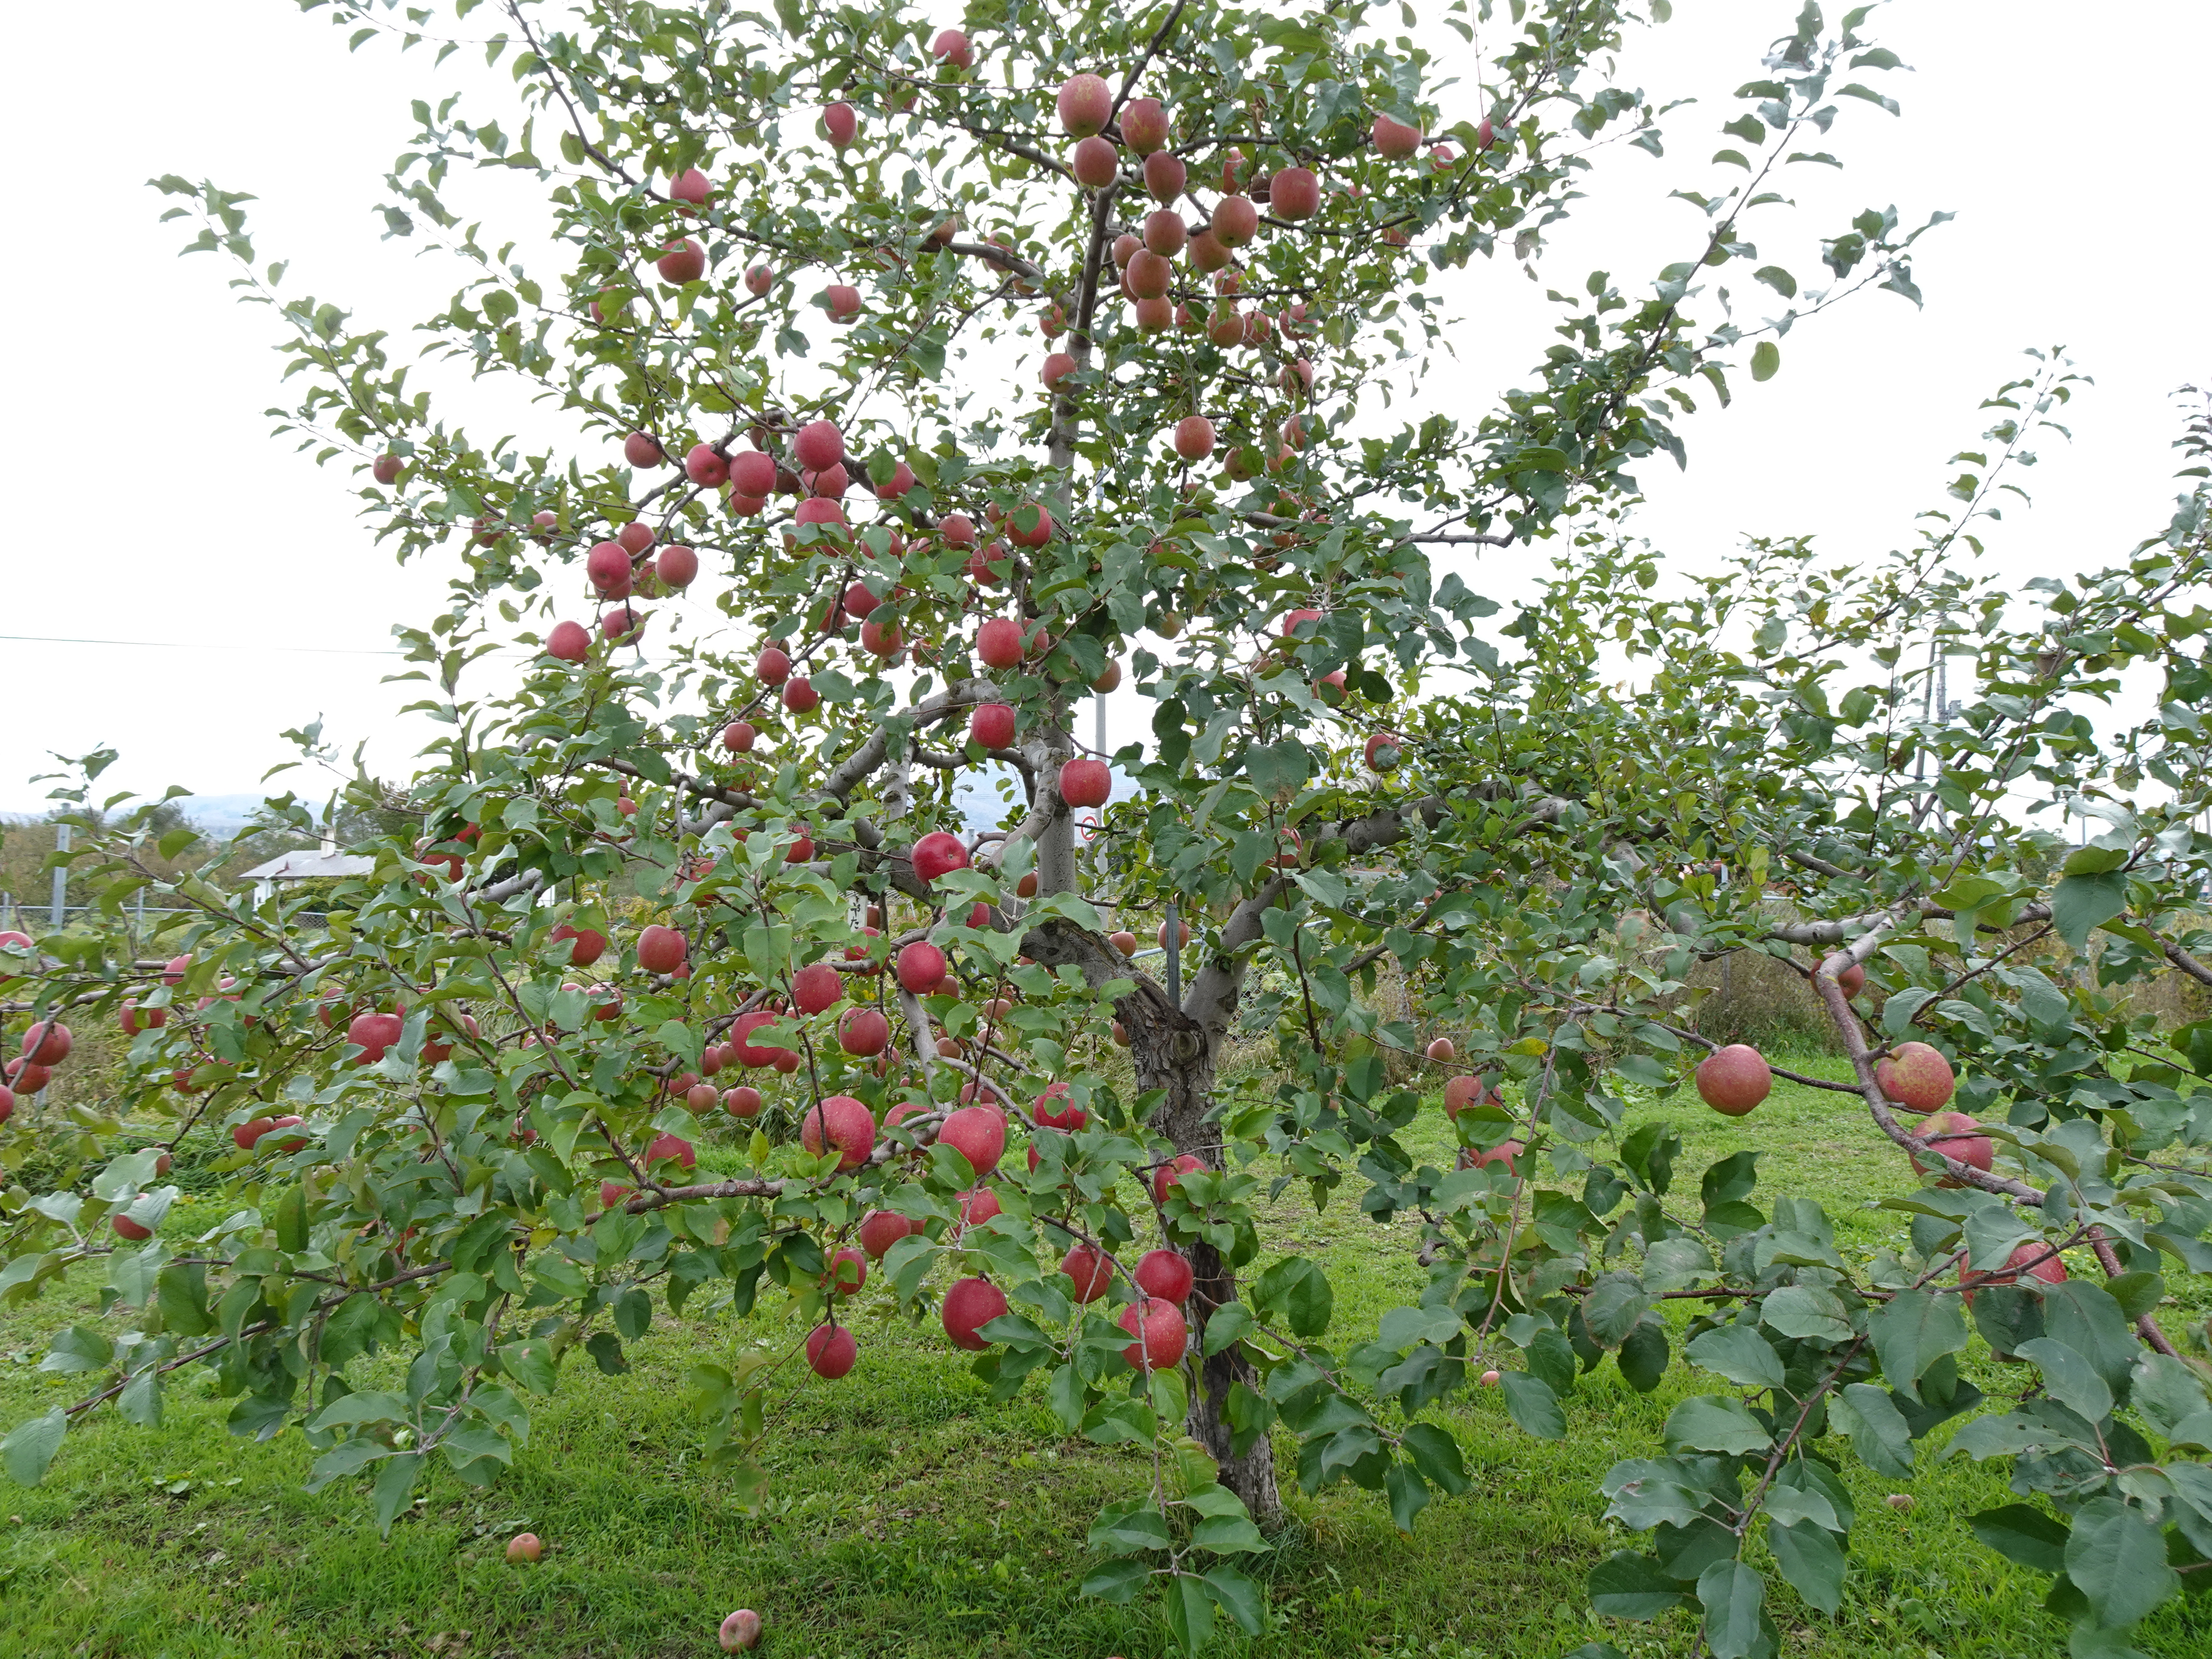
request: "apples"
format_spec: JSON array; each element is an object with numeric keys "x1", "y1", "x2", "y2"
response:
[
  {"x1": 983, "y1": 998, "x2": 1014, "y2": 1028},
  {"x1": 861, "y1": 615, "x2": 901, "y2": 658},
  {"x1": 1373, "y1": 102, "x2": 1424, "y2": 161},
  {"x1": 969, "y1": 542, "x2": 1007, "y2": 586},
  {"x1": 1057, "y1": 1241, "x2": 1115, "y2": 1306},
  {"x1": 718, "y1": 1090, "x2": 751, "y2": 1116},
  {"x1": 1320, "y1": 1097, "x2": 1340, "y2": 1119},
  {"x1": 596, "y1": 793, "x2": 644, "y2": 845},
  {"x1": 1033, "y1": 1081, "x2": 1092, "y2": 1135},
  {"x1": 756, "y1": 648, "x2": 791, "y2": 687},
  {"x1": 958, "y1": 1081, "x2": 998, "y2": 1115},
  {"x1": 672, "y1": 856, "x2": 726, "y2": 908},
  {"x1": 638, "y1": 1129, "x2": 698, "y2": 1191},
  {"x1": 449, "y1": 810, "x2": 498, "y2": 851},
  {"x1": 413, "y1": 836, "x2": 468, "y2": 891},
  {"x1": 1159, "y1": 813, "x2": 1183, "y2": 836},
  {"x1": 717, "y1": 759, "x2": 758, "y2": 798},
  {"x1": 862, "y1": 1044, "x2": 902, "y2": 1081},
  {"x1": 1086, "y1": 655, "x2": 1122, "y2": 695},
  {"x1": 1059, "y1": 758, "x2": 1112, "y2": 810},
  {"x1": 1456, "y1": 1137, "x2": 1530, "y2": 1199},
  {"x1": 1370, "y1": 556, "x2": 1408, "y2": 589},
  {"x1": 693, "y1": 1046, "x2": 723, "y2": 1076},
  {"x1": 1457, "y1": 879, "x2": 1474, "y2": 895},
  {"x1": 952, "y1": 548, "x2": 981, "y2": 577},
  {"x1": 667, "y1": 1009, "x2": 700, "y2": 1037},
  {"x1": 883, "y1": 1101, "x2": 940, "y2": 1165},
  {"x1": 656, "y1": 544, "x2": 699, "y2": 587},
  {"x1": 710, "y1": 980, "x2": 752, "y2": 1015},
  {"x1": 934, "y1": 1037, "x2": 962, "y2": 1067},
  {"x1": 936, "y1": 513, "x2": 977, "y2": 556},
  {"x1": 1223, "y1": 441, "x2": 1263, "y2": 482},
  {"x1": 862, "y1": 527, "x2": 904, "y2": 569},
  {"x1": 1427, "y1": 1037, "x2": 1455, "y2": 1067},
  {"x1": 821, "y1": 101, "x2": 857, "y2": 147},
  {"x1": 407, "y1": 1113, "x2": 446, "y2": 1149},
  {"x1": 549, "y1": 907, "x2": 611, "y2": 969},
  {"x1": 975, "y1": 1102, "x2": 1011, "y2": 1140},
  {"x1": 783, "y1": 677, "x2": 819, "y2": 716},
  {"x1": 799, "y1": 460, "x2": 849, "y2": 505},
  {"x1": 1016, "y1": 619, "x2": 1049, "y2": 661},
  {"x1": 939, "y1": 1024, "x2": 969, "y2": 1044},
  {"x1": 896, "y1": 940, "x2": 947, "y2": 996},
  {"x1": 754, "y1": 996, "x2": 790, "y2": 1028},
  {"x1": 859, "y1": 1206, "x2": 913, "y2": 1259},
  {"x1": 135, "y1": 1146, "x2": 171, "y2": 1180},
  {"x1": 1282, "y1": 606, "x2": 1330, "y2": 654},
  {"x1": 1121, "y1": 95, "x2": 1170, "y2": 155},
  {"x1": 578, "y1": 1037, "x2": 600, "y2": 1055},
  {"x1": 995, "y1": 982, "x2": 1016, "y2": 1004},
  {"x1": 819, "y1": 524, "x2": 856, "y2": 557},
  {"x1": 813, "y1": 595, "x2": 846, "y2": 634},
  {"x1": 783, "y1": 527, "x2": 815, "y2": 559},
  {"x1": 1057, "y1": 72, "x2": 1113, "y2": 138},
  {"x1": 1177, "y1": 296, "x2": 1208, "y2": 336},
  {"x1": 761, "y1": 636, "x2": 790, "y2": 665},
  {"x1": 1040, "y1": 303, "x2": 1074, "y2": 336},
  {"x1": 609, "y1": 772, "x2": 630, "y2": 800},
  {"x1": 881, "y1": 67, "x2": 920, "y2": 115},
  {"x1": 1445, "y1": 1073, "x2": 1503, "y2": 1131},
  {"x1": 1206, "y1": 310, "x2": 1245, "y2": 351},
  {"x1": 372, "y1": 453, "x2": 404, "y2": 486},
  {"x1": 1487, "y1": 865, "x2": 1510, "y2": 887},
  {"x1": 919, "y1": 207, "x2": 961, "y2": 250},
  {"x1": 911, "y1": 829, "x2": 970, "y2": 890},
  {"x1": 939, "y1": 1105, "x2": 1004, "y2": 1175},
  {"x1": 731, "y1": 1008, "x2": 789, "y2": 1069},
  {"x1": 838, "y1": 1008, "x2": 890, "y2": 1058},
  {"x1": 1092, "y1": 559, "x2": 1116, "y2": 580},
  {"x1": 1283, "y1": 411, "x2": 1320, "y2": 452},
  {"x1": 906, "y1": 536, "x2": 938, "y2": 566},
  {"x1": 1169, "y1": 362, "x2": 1201, "y2": 392},
  {"x1": 1874, "y1": 1041, "x2": 1956, "y2": 1113},
  {"x1": 1189, "y1": 227, "x2": 1233, "y2": 274},
  {"x1": 913, "y1": 638, "x2": 944, "y2": 668},
  {"x1": 419, "y1": 1013, "x2": 481, "y2": 1071},
  {"x1": 557, "y1": 983, "x2": 588, "y2": 1025},
  {"x1": 793, "y1": 418, "x2": 843, "y2": 472},
  {"x1": 727, "y1": 1085, "x2": 763, "y2": 1118},
  {"x1": 729, "y1": 449, "x2": 777, "y2": 497},
  {"x1": 1253, "y1": 74, "x2": 1290, "y2": 112},
  {"x1": 941, "y1": 1276, "x2": 1009, "y2": 1353},
  {"x1": 846, "y1": 579, "x2": 896, "y2": 622},
  {"x1": 933, "y1": 27, "x2": 974, "y2": 76},
  {"x1": 601, "y1": 608, "x2": 646, "y2": 648},
  {"x1": 618, "y1": 521, "x2": 657, "y2": 562},
  {"x1": 171, "y1": 1051, "x2": 214, "y2": 1093},
  {"x1": 1154, "y1": 1150, "x2": 1212, "y2": 1213},
  {"x1": 22, "y1": 1022, "x2": 73, "y2": 1067},
  {"x1": 583, "y1": 986, "x2": 620, "y2": 1023},
  {"x1": 1142, "y1": 149, "x2": 1187, "y2": 202},
  {"x1": 1210, "y1": 194, "x2": 1260, "y2": 247},
  {"x1": 954, "y1": 900, "x2": 990, "y2": 938},
  {"x1": 1694, "y1": 1043, "x2": 1773, "y2": 1117},
  {"x1": 112, "y1": 1191, "x2": 156, "y2": 1244},
  {"x1": 822, "y1": 284, "x2": 863, "y2": 325},
  {"x1": 686, "y1": 1081, "x2": 718, "y2": 1112},
  {"x1": 743, "y1": 264, "x2": 775, "y2": 297},
  {"x1": 657, "y1": 234, "x2": 705, "y2": 286},
  {"x1": 1112, "y1": 1019, "x2": 1144, "y2": 1048},
  {"x1": 595, "y1": 573, "x2": 634, "y2": 602},
  {"x1": 1177, "y1": 113, "x2": 1207, "y2": 145},
  {"x1": 1072, "y1": 136, "x2": 1119, "y2": 187},
  {"x1": 1250, "y1": 652, "x2": 1286, "y2": 682},
  {"x1": 1246, "y1": 495, "x2": 1286, "y2": 530},
  {"x1": 1149, "y1": 539, "x2": 1184, "y2": 571},
  {"x1": 660, "y1": 1069, "x2": 700, "y2": 1105},
  {"x1": 526, "y1": 509, "x2": 563, "y2": 546},
  {"x1": 599, "y1": 1172, "x2": 668, "y2": 1221},
  {"x1": 1260, "y1": 824, "x2": 1302, "y2": 869},
  {"x1": 1156, "y1": 915, "x2": 1191, "y2": 954},
  {"x1": 1207, "y1": 150, "x2": 1249, "y2": 195},
  {"x1": 1250, "y1": 174, "x2": 1279, "y2": 204},
  {"x1": 1363, "y1": 733, "x2": 1405, "y2": 775},
  {"x1": 814, "y1": 1245, "x2": 867, "y2": 1298},
  {"x1": 795, "y1": 496, "x2": 844, "y2": 541},
  {"x1": 889, "y1": 578, "x2": 916, "y2": 618},
  {"x1": 208, "y1": 1045, "x2": 234, "y2": 1070},
  {"x1": 1312, "y1": 669, "x2": 1351, "y2": 708},
  {"x1": 636, "y1": 922, "x2": 687, "y2": 976},
  {"x1": 119, "y1": 997, "x2": 167, "y2": 1039},
  {"x1": 1242, "y1": 309, "x2": 1272, "y2": 346},
  {"x1": 1957, "y1": 1236, "x2": 2071, "y2": 1343},
  {"x1": 925, "y1": 975, "x2": 960, "y2": 1010},
  {"x1": 1281, "y1": 302, "x2": 1319, "y2": 341},
  {"x1": 1301, "y1": 514, "x2": 1338, "y2": 543},
  {"x1": 1006, "y1": 502, "x2": 1054, "y2": 551},
  {"x1": 1421, "y1": 887, "x2": 1448, "y2": 908},
  {"x1": 983, "y1": 230, "x2": 1019, "y2": 274},
  {"x1": 472, "y1": 513, "x2": 509, "y2": 549},
  {"x1": 163, "y1": 951, "x2": 211, "y2": 994},
  {"x1": 1909, "y1": 1109, "x2": 1995, "y2": 1192},
  {"x1": 949, "y1": 1184, "x2": 1016, "y2": 1242},
  {"x1": 773, "y1": 823, "x2": 819, "y2": 864},
  {"x1": 356, "y1": 1214, "x2": 417, "y2": 1260},
  {"x1": 1118, "y1": 268, "x2": 1155, "y2": 305},
  {"x1": 1810, "y1": 949, "x2": 1867, "y2": 1003},
  {"x1": 1018, "y1": 952, "x2": 1059, "y2": 989},
  {"x1": 1105, "y1": 929, "x2": 1138, "y2": 964},
  {"x1": 719, "y1": 1038, "x2": 747, "y2": 1068},
  {"x1": 636, "y1": 562, "x2": 669, "y2": 599},
  {"x1": 508, "y1": 1115, "x2": 538, "y2": 1149},
  {"x1": 843, "y1": 926, "x2": 890, "y2": 978},
  {"x1": 1271, "y1": 165, "x2": 1322, "y2": 221},
  {"x1": 587, "y1": 279, "x2": 635, "y2": 331},
  {"x1": 975, "y1": 617, "x2": 1028, "y2": 672},
  {"x1": 269, "y1": 1116, "x2": 308, "y2": 1153},
  {"x1": 1130, "y1": 1248, "x2": 1193, "y2": 1309},
  {"x1": 0, "y1": 1082, "x2": 15, "y2": 1132},
  {"x1": 1425, "y1": 146, "x2": 1457, "y2": 181},
  {"x1": 545, "y1": 620, "x2": 593, "y2": 667},
  {"x1": 625, "y1": 430, "x2": 663, "y2": 469},
  {"x1": 1143, "y1": 208, "x2": 1187, "y2": 256},
  {"x1": 913, "y1": 1169, "x2": 929, "y2": 1185},
  {"x1": 1474, "y1": 112, "x2": 1513, "y2": 154},
  {"x1": 317, "y1": 986, "x2": 370, "y2": 1031},
  {"x1": 1329, "y1": 184, "x2": 1368, "y2": 220},
  {"x1": 1010, "y1": 866, "x2": 1043, "y2": 901},
  {"x1": 731, "y1": 701, "x2": 766, "y2": 737},
  {"x1": 774, "y1": 1049, "x2": 801, "y2": 1076},
  {"x1": 1127, "y1": 247, "x2": 1172, "y2": 301},
  {"x1": 1027, "y1": 1127, "x2": 1090, "y2": 1191},
  {"x1": 396, "y1": 987, "x2": 454, "y2": 1042},
  {"x1": 944, "y1": 580, "x2": 977, "y2": 614},
  {"x1": 971, "y1": 702, "x2": 1018, "y2": 749},
  {"x1": 855, "y1": 904, "x2": 889, "y2": 936},
  {"x1": 1117, "y1": 1295, "x2": 1187, "y2": 1376},
  {"x1": 1175, "y1": 417, "x2": 1216, "y2": 461},
  {"x1": 0, "y1": 931, "x2": 39, "y2": 985},
  {"x1": 731, "y1": 485, "x2": 768, "y2": 519},
  {"x1": 7, "y1": 1057, "x2": 53, "y2": 1095},
  {"x1": 800, "y1": 1094, "x2": 875, "y2": 1176},
  {"x1": 687, "y1": 442, "x2": 732, "y2": 490},
  {"x1": 1214, "y1": 267, "x2": 1247, "y2": 303},
  {"x1": 1280, "y1": 357, "x2": 1315, "y2": 399},
  {"x1": 987, "y1": 497, "x2": 1027, "y2": 526},
  {"x1": 1012, "y1": 255, "x2": 1043, "y2": 293},
  {"x1": 750, "y1": 417, "x2": 785, "y2": 454},
  {"x1": 804, "y1": 1323, "x2": 857, "y2": 1380},
  {"x1": 724, "y1": 721, "x2": 755, "y2": 755},
  {"x1": 891, "y1": 1202, "x2": 936, "y2": 1240},
  {"x1": 1154, "y1": 610, "x2": 1184, "y2": 640},
  {"x1": 668, "y1": 167, "x2": 716, "y2": 220},
  {"x1": 591, "y1": 978, "x2": 628, "y2": 1012},
  {"x1": 1267, "y1": 442, "x2": 1298, "y2": 481},
  {"x1": 347, "y1": 1013, "x2": 409, "y2": 1068},
  {"x1": 978, "y1": 1029, "x2": 1009, "y2": 1055},
  {"x1": 1042, "y1": 352, "x2": 1080, "y2": 394},
  {"x1": 197, "y1": 975, "x2": 257, "y2": 1036},
  {"x1": 520, "y1": 1036, "x2": 558, "y2": 1079},
  {"x1": 873, "y1": 459, "x2": 915, "y2": 505},
  {"x1": 233, "y1": 1116, "x2": 274, "y2": 1152},
  {"x1": 1113, "y1": 233, "x2": 1147, "y2": 271},
  {"x1": 875, "y1": 244, "x2": 915, "y2": 272},
  {"x1": 1173, "y1": 891, "x2": 1204, "y2": 918},
  {"x1": 1253, "y1": 532, "x2": 1291, "y2": 576},
  {"x1": 1299, "y1": 478, "x2": 1330, "y2": 509},
  {"x1": 1136, "y1": 293, "x2": 1174, "y2": 336},
  {"x1": 898, "y1": 1076, "x2": 930, "y2": 1106},
  {"x1": 1176, "y1": 482, "x2": 1208, "y2": 513},
  {"x1": 791, "y1": 961, "x2": 843, "y2": 1019},
  {"x1": 587, "y1": 541, "x2": 632, "y2": 591},
  {"x1": 824, "y1": 1220, "x2": 848, "y2": 1245},
  {"x1": 1189, "y1": 587, "x2": 1219, "y2": 616},
  {"x1": 1380, "y1": 208, "x2": 1416, "y2": 251},
  {"x1": 771, "y1": 462, "x2": 803, "y2": 494}
]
